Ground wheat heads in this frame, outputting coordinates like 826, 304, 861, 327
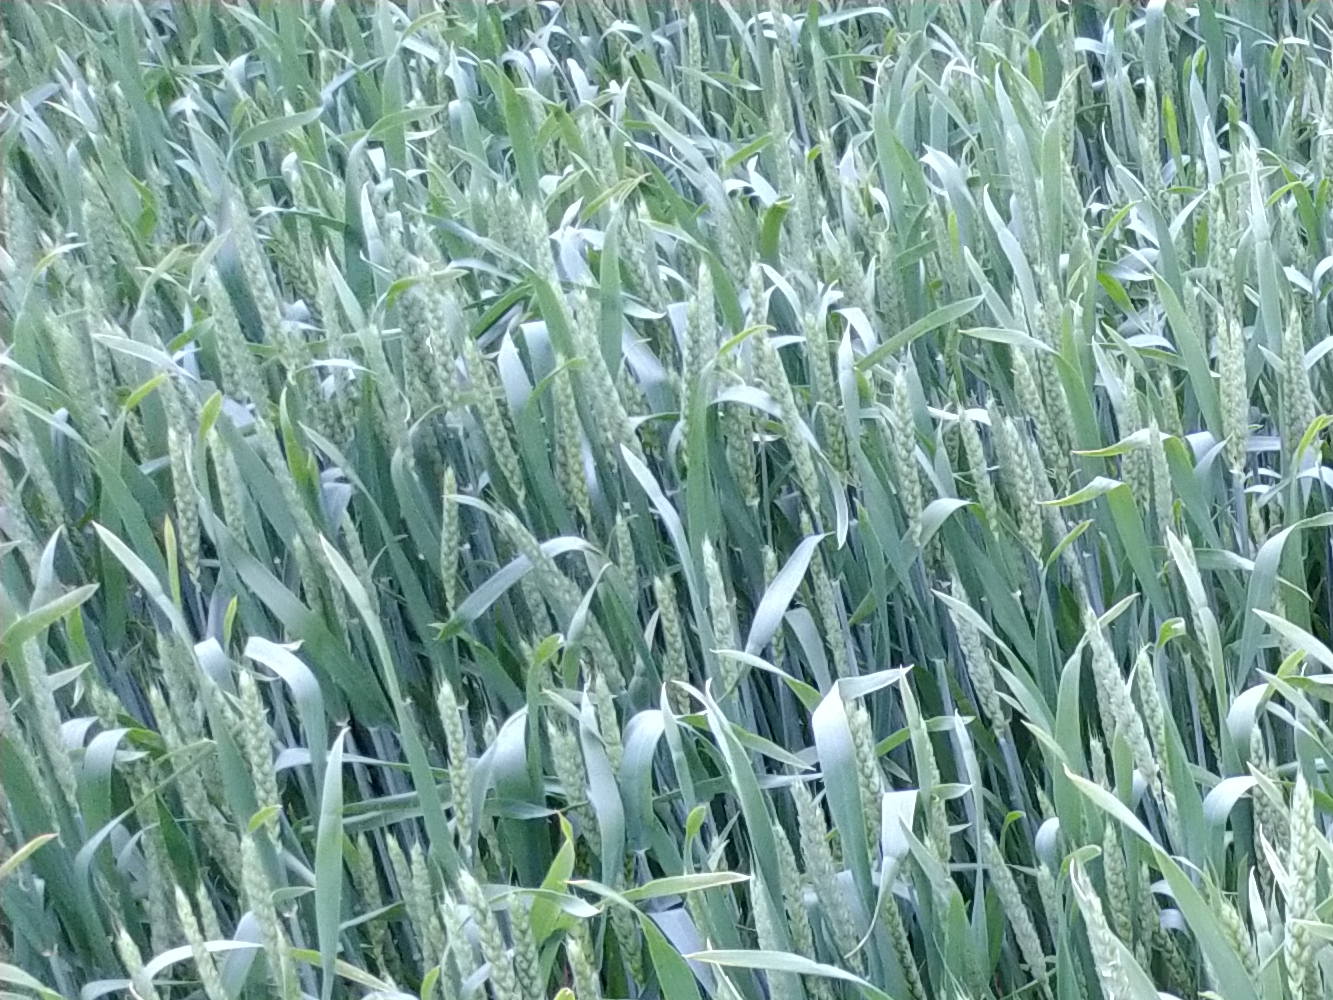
486, 363, 519, 450
1285, 781, 1317, 990
803, 318, 847, 468
1219, 224, 1240, 318
941, 1, 964, 45
772, 825, 813, 955
990, 398, 1017, 502
883, 890, 926, 1000
869, 0, 895, 45
796, 172, 808, 239
567, 941, 617, 1000
547, 727, 603, 856
1009, 349, 1067, 487
519, 566, 555, 653
1013, 294, 1044, 397
47, 320, 105, 442
621, 59, 655, 126
243, 837, 281, 983
1286, 312, 1316, 450
173, 886, 245, 1000
531, 207, 554, 279
3, 179, 29, 264
804, 153, 825, 232
502, 518, 628, 686
803, 515, 846, 649
82, 205, 117, 305
459, 873, 529, 1000
501, 513, 579, 604
330, 563, 348, 625
809, 545, 853, 676
424, 293, 464, 408
272, 225, 314, 301
149, 693, 246, 885
730, 43, 741, 110
592, 119, 619, 193
342, 515, 374, 605
94, 875, 124, 926
719, 212, 747, 286
670, 84, 687, 144
1079, 48, 1094, 117
615, 223, 668, 339
575, 343, 617, 472
980, 833, 1047, 972
724, 405, 757, 501
1195, 681, 1220, 749
294, 176, 316, 276
892, 373, 922, 533
247, 98, 288, 167
157, 633, 205, 744
1153, 430, 1171, 524
315, 262, 353, 423
828, 24, 843, 57
125, 407, 151, 461
1255, 159, 1273, 221
1137, 655, 1171, 782
142, 833, 175, 957
1159, 27, 1176, 100
210, 429, 247, 544
162, 344, 201, 411
134, 779, 176, 887
1221, 906, 1262, 1000
1249, 728, 1291, 852
1201, 264, 1218, 338
442, 467, 460, 611
1293, 48, 1304, 123
687, 13, 701, 113
765, 549, 785, 661
5, 399, 65, 527
1237, 150, 1252, 229
1142, 141, 1167, 215
781, 875, 820, 992
655, 577, 690, 712
974, 219, 983, 267
1137, 439, 1151, 511
386, 975, 412, 1000
821, 134, 841, 205
168, 427, 201, 576
87, 67, 122, 150
168, 635, 247, 747
773, 46, 789, 129
698, 262, 716, 369
571, 300, 635, 445
739, 49, 760, 120
1183, 278, 1202, 350
287, 332, 342, 438
508, 195, 533, 261
558, 360, 590, 501
109, 81, 133, 159
1107, 79, 1125, 161
1322, 73, 1333, 184
751, 875, 808, 1000
1059, 77, 1075, 162
386, 834, 422, 940
64, 515, 104, 604
257, 421, 329, 567
419, 407, 443, 479
413, 95, 447, 188
1028, 442, 1055, 513
280, 262, 295, 301
355, 835, 387, 958
1085, 613, 1159, 788
1194, 159, 1208, 257
507, 896, 550, 1000
204, 682, 250, 759
918, 721, 951, 861
678, 240, 699, 295
319, 53, 332, 90
747, 263, 766, 388
464, 341, 525, 496
1222, 166, 1236, 214
22, 637, 79, 805
846, 184, 884, 257
438, 683, 473, 830
1161, 377, 1182, 439
354, 875, 404, 983
593, 674, 625, 770
1230, 318, 1249, 461
762, 343, 821, 507
0, 459, 42, 579
942, 412, 958, 471
522, 71, 558, 172
589, 0, 631, 56
1147, 77, 1158, 156
1060, 156, 1085, 244
1102, 822, 1132, 947
771, 109, 793, 196
896, 0, 912, 27
239, 673, 282, 837
365, 327, 410, 451
619, 365, 661, 448
148, 688, 208, 826
1280, 200, 1301, 266
611, 881, 645, 985
211, 320, 247, 409
1169, 195, 1180, 227
80, 171, 149, 287
441, 904, 494, 1000
815, 974, 850, 1000
257, 86, 286, 165
1015, 80, 1046, 130
1224, 55, 1238, 115
353, 104, 366, 147
438, 48, 448, 126
84, 285, 117, 411
1121, 376, 1146, 502
206, 271, 275, 423
851, 710, 883, 866
846, 15, 860, 84
399, 293, 434, 412
703, 537, 739, 688
1037, 875, 1063, 937
926, 242, 946, 308
155, 369, 188, 437
554, 380, 575, 507
230, 204, 289, 358
279, 929, 308, 1000
1006, 135, 1040, 263
395, 876, 440, 959
1282, 333, 1298, 453
1304, 960, 1328, 1000
1218, 318, 1236, 458
411, 843, 441, 968
372, 398, 397, 462
1125, 34, 1142, 81
616, 515, 638, 604
1003, 423, 1043, 554
1209, 187, 1221, 245
1077, 882, 1149, 1000
293, 537, 322, 616
685, 881, 712, 940
877, 243, 905, 330
791, 781, 866, 972
837, 237, 867, 309
1033, 310, 1076, 445
937, 207, 967, 318
801, 90, 816, 140
116, 931, 181, 1000
960, 415, 997, 533
1044, 282, 1063, 348
196, 879, 226, 963
950, 598, 1004, 730
559, 136, 570, 178
771, 0, 801, 80
940, 324, 962, 373
682, 307, 697, 435
1138, 878, 1194, 993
